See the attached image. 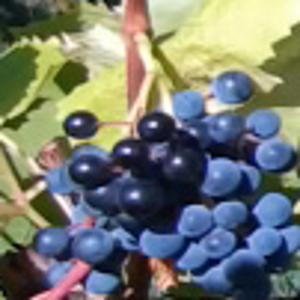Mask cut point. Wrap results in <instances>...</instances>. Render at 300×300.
I'll use <instances>...</instances> for the list:
<instances>
[{"instance_id":"obj_1","label":"cut point","mask_w":300,"mask_h":300,"mask_svg":"<svg viewBox=\"0 0 300 300\" xmlns=\"http://www.w3.org/2000/svg\"><path fill=\"white\" fill-rule=\"evenodd\" d=\"M134 40L138 46L143 61L146 77L144 83L139 90V97L135 105L131 107L128 114L124 118L122 125V135L129 137L131 135L132 125L137 117L145 115V106L147 104V94L157 79L160 91V107L169 116L176 114L175 103L172 101L173 87L169 79V75L162 67L161 62L151 48V38L143 32L134 34Z\"/></svg>"}]
</instances>
